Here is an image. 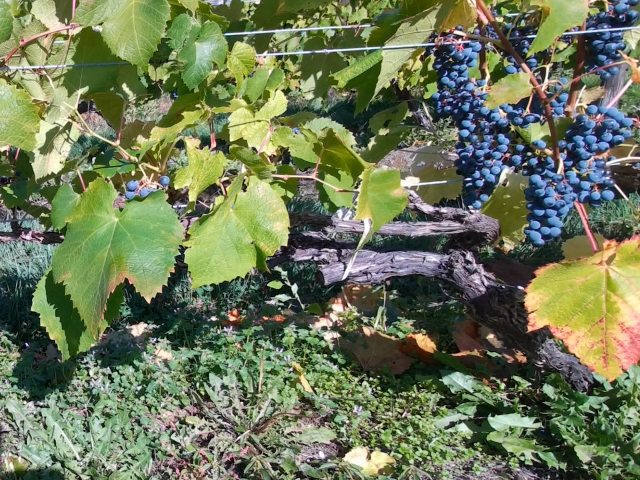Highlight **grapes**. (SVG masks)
<instances>
[{
  "instance_id": "2",
  "label": "grapes",
  "mask_w": 640,
  "mask_h": 480,
  "mask_svg": "<svg viewBox=\"0 0 640 480\" xmlns=\"http://www.w3.org/2000/svg\"><path fill=\"white\" fill-rule=\"evenodd\" d=\"M598 113L604 115L602 125L587 117ZM633 124L631 117L614 107L607 109L588 104L585 114L577 115V109L574 111V123L565 132V138L558 140V148L568 153L562 152L559 158L566 167H573L576 161L579 173L592 169L587 180H582L575 171H567L564 175L556 173L553 157H547L544 162L531 157L529 166L521 168V174L529 176L530 187L524 190V195L528 202L526 209L532 211L526 215L529 226L524 228V233L529 235L534 247H541L563 234L562 218L570 212L574 202H588L592 207H598L603 201L615 199L613 190L593 191V184L614 187L616 180L611 177L612 169L606 167L604 158L589 159L630 139L632 132L620 129L630 128Z\"/></svg>"
},
{
  "instance_id": "8",
  "label": "grapes",
  "mask_w": 640,
  "mask_h": 480,
  "mask_svg": "<svg viewBox=\"0 0 640 480\" xmlns=\"http://www.w3.org/2000/svg\"><path fill=\"white\" fill-rule=\"evenodd\" d=\"M511 27H512L511 23H507L504 25L502 30V33L504 34V36H507L508 33H509V36H520L525 33H535L537 35L539 33V30L535 26L525 25L519 28L518 25H515L512 28V30H511Z\"/></svg>"
},
{
  "instance_id": "6",
  "label": "grapes",
  "mask_w": 640,
  "mask_h": 480,
  "mask_svg": "<svg viewBox=\"0 0 640 480\" xmlns=\"http://www.w3.org/2000/svg\"><path fill=\"white\" fill-rule=\"evenodd\" d=\"M139 184L140 181L137 179H131L128 182L125 183V186L127 187V190L125 192V198L129 199V200H133L135 198V194L139 193V196L141 198H145L147 197L150 193H155L156 189L155 188H142L140 191L139 189Z\"/></svg>"
},
{
  "instance_id": "10",
  "label": "grapes",
  "mask_w": 640,
  "mask_h": 480,
  "mask_svg": "<svg viewBox=\"0 0 640 480\" xmlns=\"http://www.w3.org/2000/svg\"><path fill=\"white\" fill-rule=\"evenodd\" d=\"M621 71V68L618 66H611L608 69L597 70L596 74L599 75L603 79H610L612 75H618Z\"/></svg>"
},
{
  "instance_id": "7",
  "label": "grapes",
  "mask_w": 640,
  "mask_h": 480,
  "mask_svg": "<svg viewBox=\"0 0 640 480\" xmlns=\"http://www.w3.org/2000/svg\"><path fill=\"white\" fill-rule=\"evenodd\" d=\"M568 100V93H559L558 97L550 103V108H554V112H552L553 119H559L564 116Z\"/></svg>"
},
{
  "instance_id": "4",
  "label": "grapes",
  "mask_w": 640,
  "mask_h": 480,
  "mask_svg": "<svg viewBox=\"0 0 640 480\" xmlns=\"http://www.w3.org/2000/svg\"><path fill=\"white\" fill-rule=\"evenodd\" d=\"M608 11L595 13L586 17L584 23L588 27L634 26L640 20V12L635 8L640 0H609Z\"/></svg>"
},
{
  "instance_id": "11",
  "label": "grapes",
  "mask_w": 640,
  "mask_h": 480,
  "mask_svg": "<svg viewBox=\"0 0 640 480\" xmlns=\"http://www.w3.org/2000/svg\"><path fill=\"white\" fill-rule=\"evenodd\" d=\"M558 81L561 82V84H558L554 87V91H547L546 92V96L548 97V99L553 98L555 95V92H560L563 89L562 85H567L569 83V79L567 76L564 77H559Z\"/></svg>"
},
{
  "instance_id": "9",
  "label": "grapes",
  "mask_w": 640,
  "mask_h": 480,
  "mask_svg": "<svg viewBox=\"0 0 640 480\" xmlns=\"http://www.w3.org/2000/svg\"><path fill=\"white\" fill-rule=\"evenodd\" d=\"M506 61L508 63L514 64V65H507L505 67V72L507 74H519L522 71L521 67L519 66L518 60L514 59L512 55H508L506 57Z\"/></svg>"
},
{
  "instance_id": "5",
  "label": "grapes",
  "mask_w": 640,
  "mask_h": 480,
  "mask_svg": "<svg viewBox=\"0 0 640 480\" xmlns=\"http://www.w3.org/2000/svg\"><path fill=\"white\" fill-rule=\"evenodd\" d=\"M512 45V48L522 56L523 60H525L526 66L530 69V72H533L536 67L540 66L539 58L536 57L535 53H532L528 59H526L525 54H528L530 49L534 44V38H528L522 41H509Z\"/></svg>"
},
{
  "instance_id": "3",
  "label": "grapes",
  "mask_w": 640,
  "mask_h": 480,
  "mask_svg": "<svg viewBox=\"0 0 640 480\" xmlns=\"http://www.w3.org/2000/svg\"><path fill=\"white\" fill-rule=\"evenodd\" d=\"M625 31H606L598 33H588L586 35V47L595 54L593 60L587 67L588 71H592L597 67L610 66L616 60L622 58L623 51L627 48V43L623 39Z\"/></svg>"
},
{
  "instance_id": "1",
  "label": "grapes",
  "mask_w": 640,
  "mask_h": 480,
  "mask_svg": "<svg viewBox=\"0 0 640 480\" xmlns=\"http://www.w3.org/2000/svg\"><path fill=\"white\" fill-rule=\"evenodd\" d=\"M483 51V44L477 40L468 38L462 50L457 46L444 45L439 47H429L427 52L435 57L432 69L437 71L439 83L454 89V94L450 91L440 90L432 95L433 106L440 118L452 116L456 122L458 135L470 143V147L464 142L455 145V153L460 159L454 161L456 174L464 176L463 187L467 191H474L481 188V194L471 192L469 196L463 198L465 207L472 206L474 209H481L483 203L489 201L495 186L499 184V175L509 164L501 161L505 154L509 152L514 134L510 124L519 126L520 129H527L531 123L537 122L546 115L545 108L540 101L538 94H535L530 106V114L522 117L526 105L529 101L525 97L518 101L516 105L510 103L499 104L498 107L490 109L483 106L489 93L487 91H474L483 88L486 80H476L470 82L468 68L478 66V54ZM481 114L488 117L487 121H481L480 134L483 137L481 142L477 134L476 116ZM496 125L497 145L491 148L495 141L491 133V126Z\"/></svg>"
}]
</instances>
